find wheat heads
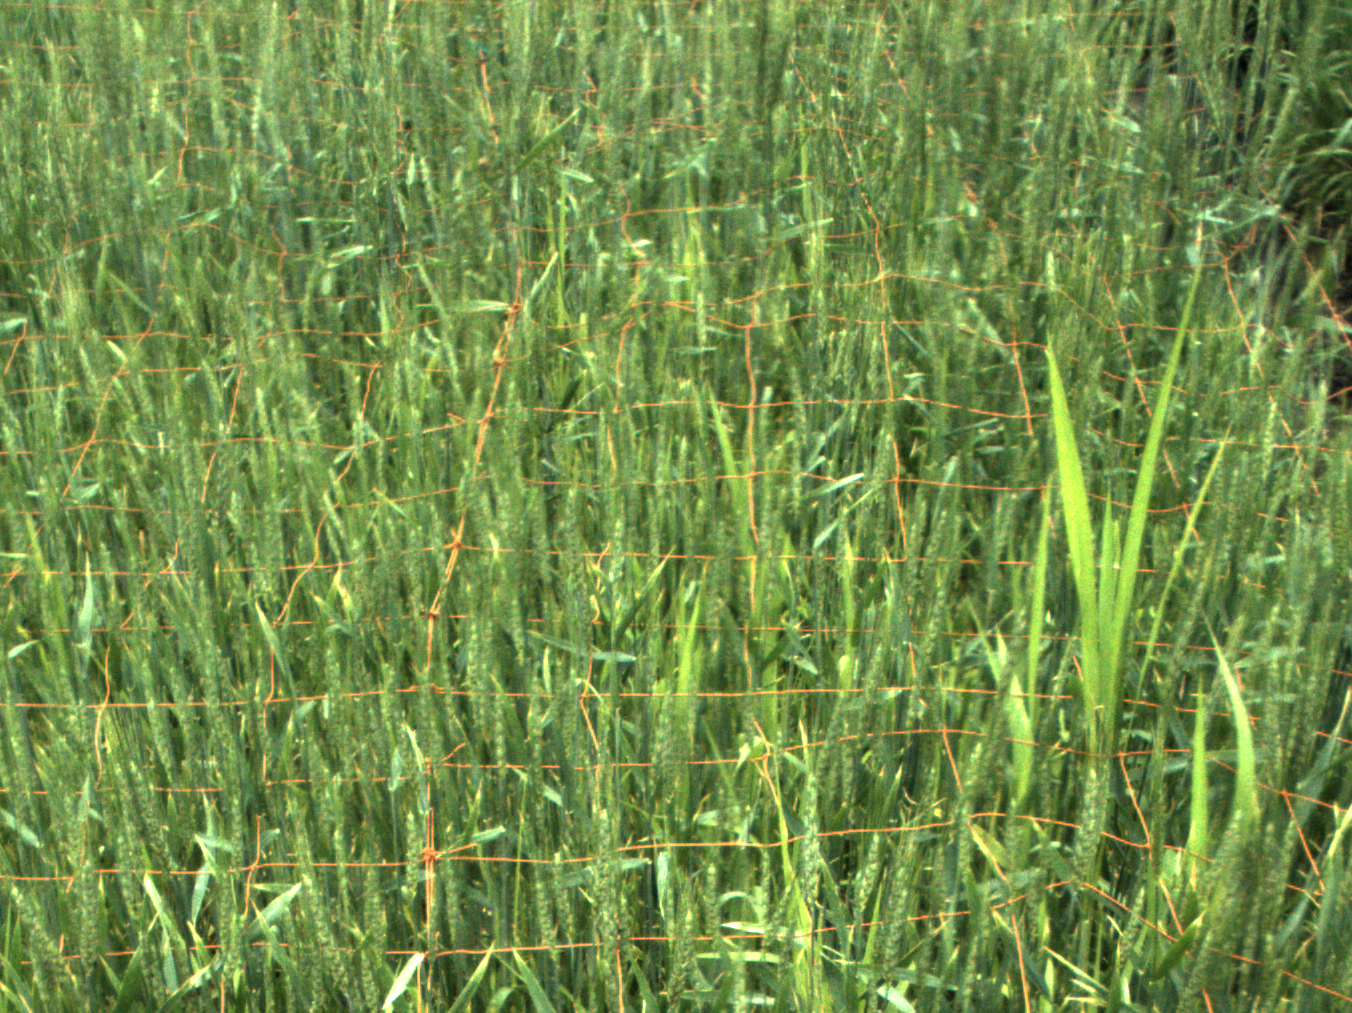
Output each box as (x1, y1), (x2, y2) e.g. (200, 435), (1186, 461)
(564, 484), (586, 600)
(149, 84), (159, 129)
(773, 728), (784, 770)
(918, 930), (937, 989)
(658, 55), (675, 101)
(818, 14), (840, 59)
(137, 929), (166, 1004)
(705, 859), (724, 945)
(358, 945), (380, 1013)
(576, 593), (597, 653)
(329, 123), (351, 174)
(383, 669), (399, 730)
(696, 498), (709, 542)
(1173, 930), (1222, 1013)
(60, 793), (89, 874)
(510, 24), (533, 91)
(1101, 424), (1115, 476)
(429, 503), (451, 600)
(1224, 353), (1244, 423)
(306, 737), (338, 849)
(167, 662), (201, 739)
(841, 741), (853, 803)
(507, 110), (524, 160)
(439, 329), (458, 380)
(271, 489), (287, 565)
(768, 304), (788, 351)
(156, 430), (165, 456)
(1118, 231), (1135, 286)
(414, 663), (445, 765)
(1248, 322), (1267, 381)
(263, 271), (284, 325)
(255, 382), (270, 442)
(511, 401), (526, 444)
(1199, 314), (1219, 372)
(796, 524), (808, 579)
(189, 570), (212, 608)
(1283, 336), (1306, 395)
(493, 691), (508, 776)
(78, 696), (96, 759)
(476, 662), (491, 736)
(271, 135), (294, 166)
(1026, 993), (1040, 1013)
(261, 941), (277, 1004)
(199, 26), (226, 99)
(1248, 602), (1281, 690)
(715, 786), (728, 832)
(50, 381), (67, 433)
(756, 384), (772, 454)
(27, 908), (59, 1005)
(607, 134), (627, 213)
(1039, 833), (1057, 870)
(1346, 617), (1352, 671)
(1142, 74), (1159, 133)
(1205, 613), (1244, 718)
(1216, 530), (1238, 585)
(258, 786), (275, 823)
(299, 869), (350, 991)
(956, 743), (985, 803)
(158, 110), (187, 140)
(807, 231), (825, 284)
(696, 289), (708, 345)
(290, 88), (307, 140)
(1048, 425), (1096, 582)
(145, 687), (173, 776)
(98, 537), (112, 585)
(955, 808), (971, 881)
(231, 798), (247, 866)
(1120, 884), (1145, 970)
(417, 154), (437, 213)
(348, 534), (373, 592)
(664, 711), (690, 791)
(1060, 90), (1077, 144)
(0, 528), (6, 622)
(1047, 636), (1077, 707)
(777, 297), (791, 335)
(441, 658), (454, 719)
(692, 439), (709, 495)
(1284, 696), (1307, 763)
(801, 772), (822, 907)
(232, 489), (252, 532)
(947, 65), (969, 130)
(1059, 310), (1082, 367)
(700, 56), (715, 135)
(856, 643), (884, 743)
(407, 998), (421, 1013)
(993, 606), (1030, 703)
(769, 100), (790, 148)
(295, 535), (321, 585)
(173, 292), (200, 341)
(1284, 607), (1302, 681)
(284, 901), (306, 962)
(790, 439), (804, 510)
(841, 331), (858, 390)
(1262, 866), (1284, 924)
(760, 32), (786, 117)
(323, 299), (345, 358)
(834, 505), (851, 572)
(1195, 26), (1217, 77)
(921, 509), (947, 579)
(1243, 76), (1258, 130)
(463, 621), (479, 700)
(454, 487), (467, 517)
(1259, 399), (1279, 480)
(630, 78), (653, 147)
(1017, 183), (1037, 270)
(1156, 579), (1209, 707)
(586, 988), (602, 1013)
(1194, 807), (1243, 899)
(811, 546), (827, 616)
(438, 856), (461, 931)
(610, 33), (633, 110)
(111, 824), (147, 918)
(531, 875), (559, 951)
(1244, 25), (1268, 73)
(732, 952), (751, 1013)
(1177, 121), (1191, 191)
(169, 931), (194, 984)
(967, 62), (1007, 189)
(739, 691), (758, 749)
(97, 445), (107, 515)
(595, 720), (610, 771)
(825, 717), (845, 801)
(1270, 88), (1296, 140)
(1149, 717), (1166, 787)
(689, 381), (706, 431)
(1251, 968), (1281, 1013)
(39, 582), (59, 643)
(268, 338), (287, 392)
(217, 868), (234, 946)
(1164, 80), (1184, 151)
(301, 269), (316, 331)
(1147, 786), (1168, 874)
(671, 33), (693, 98)
(26, 332), (41, 365)
(4, 879), (74, 981)
(369, 708), (390, 776)
(815, 688), (848, 777)
(268, 405), (294, 461)
(1177, 845), (1194, 889)
(151, 572), (173, 634)
(1081, 352), (1104, 414)
(132, 99), (141, 130)
(532, 523), (554, 590)
(1115, 58), (1132, 112)
(173, 415), (212, 488)
(319, 134), (334, 188)
(183, 619), (203, 659)
(352, 409), (369, 464)
(841, 45), (861, 109)
(23, 268), (47, 326)
(1189, 46), (1221, 119)
(511, 501), (542, 557)
(280, 971), (300, 1013)
(952, 515), (963, 546)
(807, 145), (825, 196)
(550, 848), (576, 935)
(115, 24), (137, 87)
(251, 77), (263, 139)
(358, 144), (377, 188)
(1274, 819), (1295, 923)
(572, 30), (597, 92)
(921, 684), (946, 738)
(921, 766), (938, 824)
(507, 526), (525, 590)
(267, 1), (280, 54)
(1332, 930), (1352, 1012)
(189, 489), (215, 555)
(669, 234), (682, 274)
(765, 536), (784, 602)
(374, 434), (386, 485)
(450, 176), (474, 240)
(849, 384), (861, 427)
(125, 550), (151, 608)
(1227, 468), (1238, 535)
(130, 371), (151, 419)
(735, 568), (751, 621)
(369, 565), (390, 616)
(597, 404), (609, 468)
(24, 782), (39, 827)
(434, 28), (449, 66)
(617, 411), (639, 465)
(52, 520), (72, 593)
(109, 373), (137, 418)
(262, 497), (283, 594)
(1210, 846), (1245, 926)
(628, 340), (647, 406)
(394, 707), (422, 796)
(590, 811), (619, 967)
(77, 863), (102, 975)
(510, 593), (526, 659)
(0, 419), (20, 471)
(106, 337), (128, 364)
(3, 689), (30, 783)
(307, 937), (328, 1013)
(200, 356), (226, 409)
(757, 491), (774, 555)
(1324, 949), (1343, 982)
(615, 883), (636, 961)
(1034, 758), (1055, 827)
(828, 333), (849, 379)
(390, 358), (401, 407)
(554, 659), (565, 718)
(384, 516), (406, 570)
(3, 496), (30, 556)
(370, 98), (401, 179)
(244, 537), (268, 590)
(993, 491), (1016, 559)
(321, 491), (348, 538)
(90, 25), (129, 117)
(759, 847), (774, 926)
(46, 93), (72, 161)
(1243, 877), (1269, 967)
(705, 563), (723, 643)
(1024, 865), (1042, 939)
(496, 380), (517, 448)
(35, 474), (59, 528)
(479, 108), (500, 179)
(13, 573), (46, 611)
(665, 886), (677, 945)
(679, 507), (700, 580)
(362, 864), (387, 967)
(967, 312), (986, 377)
(0, 383), (24, 427)
(480, 621), (498, 667)
(222, 295), (247, 344)
(631, 640), (656, 717)
(126, 465), (172, 554)
(342, 24), (354, 62)
(605, 518), (627, 595)
(284, 387), (311, 427)
(1335, 803), (1352, 911)
(522, 297), (536, 355)
(717, 93), (731, 142)
(35, 165), (65, 226)
(529, 725), (543, 833)
(3, 143), (25, 209)
(560, 667), (581, 758)
(357, 738), (372, 785)
(932, 842), (947, 915)
(1282, 981), (1302, 1013)
(57, 664), (84, 743)
(1009, 975), (1021, 1013)
(543, 951), (560, 1005)
(1259, 930), (1277, 966)
(1308, 380), (1328, 447)
(1084, 261), (1095, 307)
(127, 756), (175, 870)
(441, 257), (459, 297)
(466, 481), (491, 542)
(334, 30), (354, 77)
(1068, 768), (1103, 889)
(246, 677), (273, 756)
(562, 808), (582, 865)
(426, 893), (439, 968)
(1318, 489), (1337, 575)
(332, 822), (350, 893)
(492, 197), (515, 247)
(1316, 643), (1339, 711)
(1086, 104), (1101, 149)
(881, 889), (908, 980)
(599, 963), (623, 1013)
(978, 907), (993, 940)
(647, 711), (676, 790)
(419, 24), (436, 70)
(929, 973), (947, 1013)
(1037, 62), (1054, 133)
(1118, 368), (1137, 416)
(723, 643), (735, 704)
(1235, 525), (1256, 574)
(406, 525), (426, 590)
(400, 811), (421, 902)
(358, 22), (374, 67)
(1255, 490), (1286, 555)
(177, 797), (195, 858)
(210, 292), (226, 351)
(1295, 29), (1329, 96)
(217, 915), (249, 999)
(1298, 674), (1319, 765)
(940, 634), (987, 674)
(1068, 231), (1084, 273)
(160, 348), (182, 407)
(1001, 65), (1037, 155)
(307, 618), (325, 684)
(653, 425), (667, 496)
(0, 723), (10, 783)
(383, 0), (399, 28)
(1140, 272), (1155, 335)
(926, 341), (943, 400)
(353, 667), (375, 734)
(1281, 225), (1307, 294)
(857, 831), (881, 911)
(814, 288), (828, 348)
(349, 368), (363, 416)
(877, 492), (888, 540)
(1045, 247), (1058, 292)
(1212, 456), (1225, 521)
(1234, 475), (1254, 513)
(1212, 68), (1227, 116)
(864, 331), (880, 389)
(675, 436), (687, 491)
(1228, 833), (1257, 940)
(871, 858), (918, 963)
(423, 79), (444, 140)
(248, 446), (263, 489)
(115, 759), (144, 848)
(595, 64), (613, 114)
(714, 513), (733, 601)
(339, 749), (358, 800)
(107, 595), (124, 636)
(544, 144), (563, 223)
(402, 356), (424, 416)
(234, 130), (244, 172)
(963, 936), (986, 1006)
(1262, 656), (1281, 783)
(923, 589), (944, 663)
(644, 493), (660, 565)
(470, 198), (490, 247)
(784, 364), (809, 441)
(926, 67), (948, 130)
(406, 332), (421, 363)
(73, 340), (98, 395)
(883, 125), (905, 181)
(281, 316), (299, 379)
(880, 435), (897, 489)
(324, 523), (342, 560)
(1296, 268), (1323, 305)
(777, 902), (798, 983)
(173, 500), (207, 569)
(978, 711), (1013, 784)
(902, 643), (924, 735)
(323, 646), (349, 736)
(56, 156), (82, 219)
(872, 692), (892, 767)
(1265, 25), (1280, 57)
(1132, 25), (1148, 70)
(1004, 795), (1021, 853)
(664, 902), (697, 1013)
(1330, 492), (1352, 592)
(726, 790), (736, 834)
(683, 96), (703, 151)
(1097, 760), (1113, 828)
(584, 754), (599, 796)
(824, 141), (842, 187)
(51, 346), (72, 375)
(1269, 161), (1293, 205)
(1259, 819), (1273, 866)
(211, 97), (228, 157)
(11, 769), (22, 834)
(862, 34), (883, 109)
(760, 881), (795, 949)
(210, 436), (236, 532)
(100, 763), (114, 835)
(1201, 374), (1227, 417)
(903, 520), (918, 595)
(493, 488), (517, 537)
(204, 631), (241, 745)
(227, 747), (257, 805)
(778, 66), (797, 103)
